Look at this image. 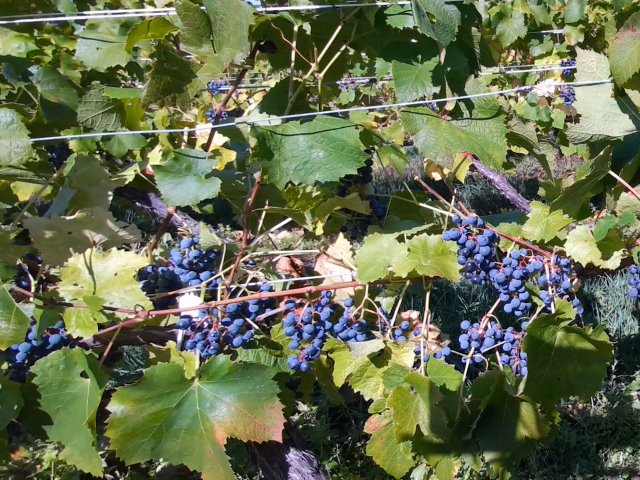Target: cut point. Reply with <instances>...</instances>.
Segmentation results:
<instances>
[{
  "instance_id": "obj_1",
  "label": "cut point",
  "mask_w": 640,
  "mask_h": 480,
  "mask_svg": "<svg viewBox=\"0 0 640 480\" xmlns=\"http://www.w3.org/2000/svg\"><path fill=\"white\" fill-rule=\"evenodd\" d=\"M368 287H369V286H365V294H364V297L362 298V300H361V301H360V303H359V307H362V306H363V304L365 303L366 299H367V300H368V302H369L370 304H372L373 306H377V303H376V302H374V301H373V300L368 296Z\"/></svg>"
},
{
  "instance_id": "obj_2",
  "label": "cut point",
  "mask_w": 640,
  "mask_h": 480,
  "mask_svg": "<svg viewBox=\"0 0 640 480\" xmlns=\"http://www.w3.org/2000/svg\"><path fill=\"white\" fill-rule=\"evenodd\" d=\"M147 249H148V252H149L148 261H149V265H150V264H152V262H154V259H152V249L150 248V245H147Z\"/></svg>"
}]
</instances>
